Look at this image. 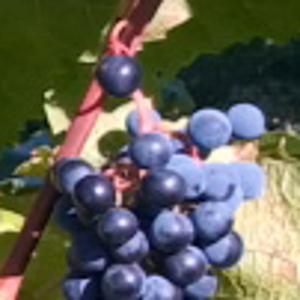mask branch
I'll use <instances>...</instances> for the list:
<instances>
[{
    "label": "branch",
    "mask_w": 300,
    "mask_h": 300,
    "mask_svg": "<svg viewBox=\"0 0 300 300\" xmlns=\"http://www.w3.org/2000/svg\"><path fill=\"white\" fill-rule=\"evenodd\" d=\"M61 197L62 192L55 186V181L47 178L44 189L25 217L21 235L0 276V296L3 300H12L20 293L34 249L44 235L56 201Z\"/></svg>",
    "instance_id": "obj_1"
},
{
    "label": "branch",
    "mask_w": 300,
    "mask_h": 300,
    "mask_svg": "<svg viewBox=\"0 0 300 300\" xmlns=\"http://www.w3.org/2000/svg\"><path fill=\"white\" fill-rule=\"evenodd\" d=\"M85 90L59 148V153L64 158L80 155L79 148L89 144L100 120L99 112L104 101V90L95 80L88 81Z\"/></svg>",
    "instance_id": "obj_2"
},
{
    "label": "branch",
    "mask_w": 300,
    "mask_h": 300,
    "mask_svg": "<svg viewBox=\"0 0 300 300\" xmlns=\"http://www.w3.org/2000/svg\"><path fill=\"white\" fill-rule=\"evenodd\" d=\"M160 9V0H125L119 7V10L114 17L109 34L106 39V47L113 52L110 46V36L115 24L121 16L128 18V24L120 38V43H125L131 53L136 49L141 41L142 35L146 26L154 20Z\"/></svg>",
    "instance_id": "obj_3"
}]
</instances>
